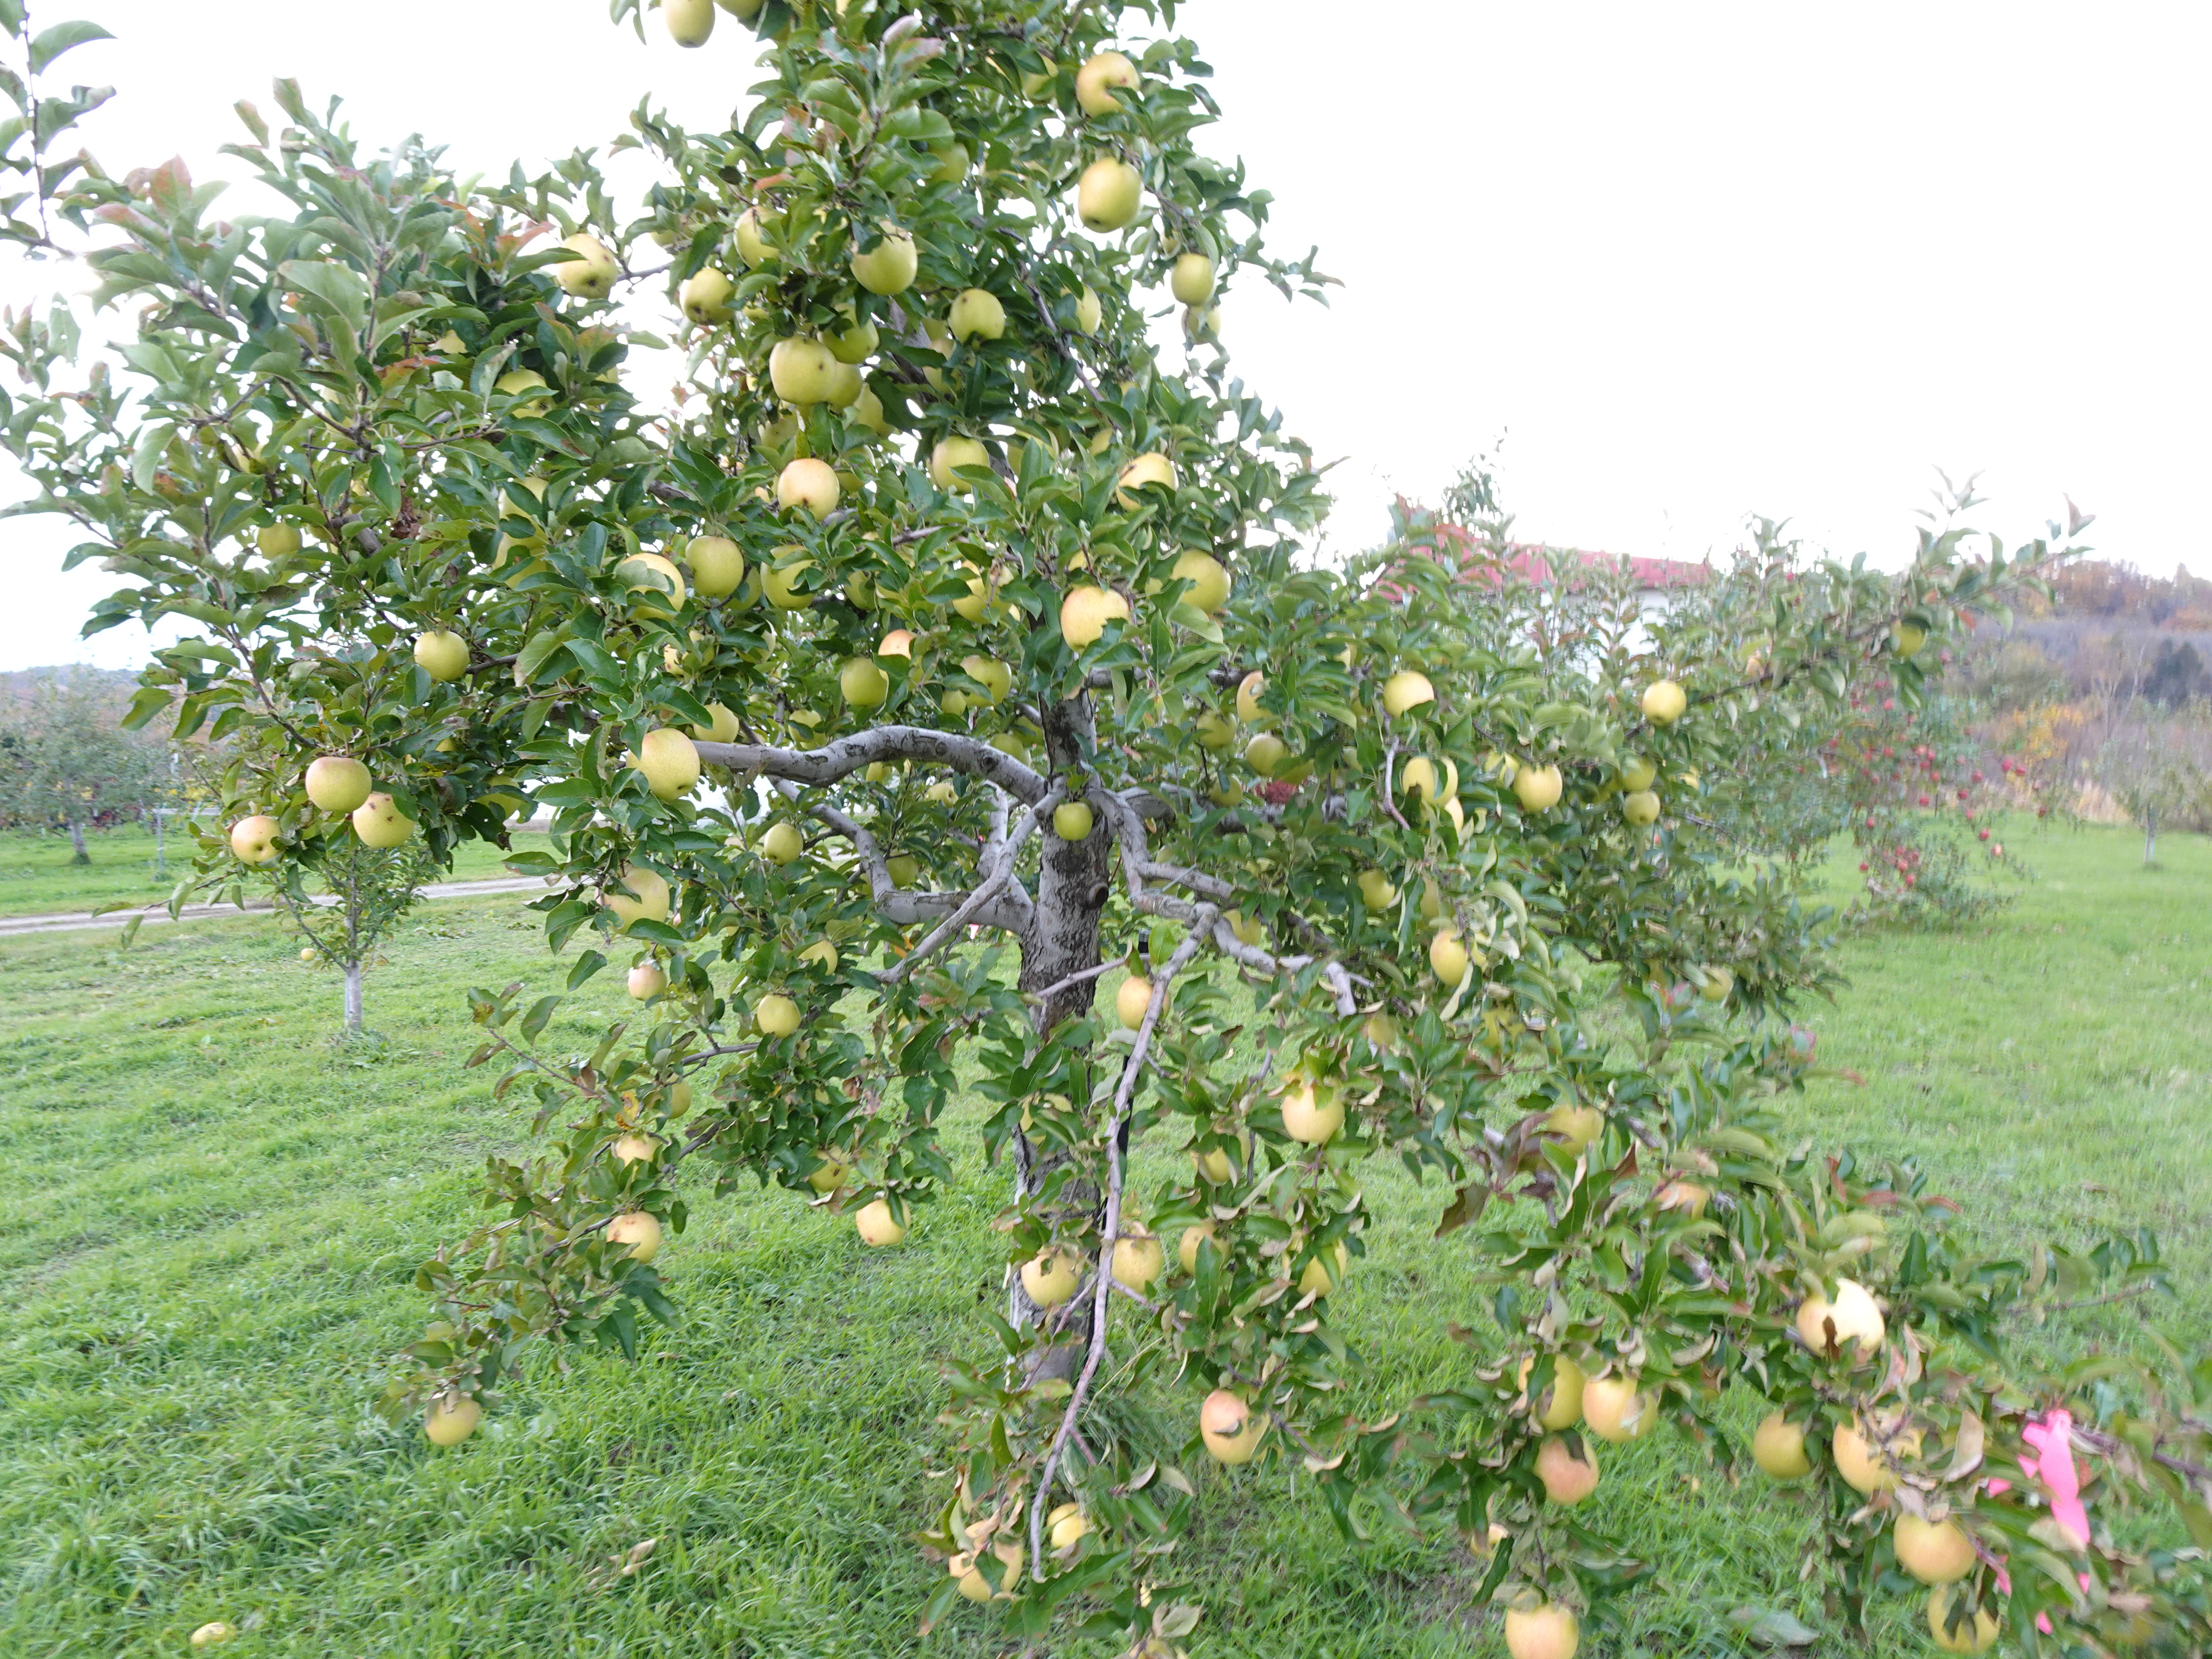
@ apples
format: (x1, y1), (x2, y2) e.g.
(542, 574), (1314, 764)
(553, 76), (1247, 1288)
(932, 435), (990, 495)
(1518, 1355), (1535, 1392)
(352, 791), (414, 848)
(1281, 1085), (1345, 1143)
(799, 733), (830, 750)
(1656, 1183), (1709, 1220)
(1752, 1409), (1813, 1479)
(664, 629), (714, 675)
(679, 267), (733, 325)
(785, 1087), (830, 1105)
(959, 654), (1011, 707)
(1676, 777), (1698, 790)
(583, 365), (618, 406)
(855, 1197), (910, 1247)
(1642, 679), (1687, 727)
(1182, 304), (1221, 344)
(424, 1390), (480, 1446)
(1075, 52), (1141, 118)
(949, 1521), (1023, 1602)
(153, 471), (176, 493)
(414, 631), (469, 680)
(555, 233), (618, 298)
(769, 335), (838, 406)
(1022, 54), (1058, 101)
(1208, 776), (1242, 807)
(1053, 802), (1093, 840)
(618, 553), (685, 623)
(1366, 1014), (1394, 1045)
(404, 737), (454, 773)
(1200, 1388), (1271, 1465)
(1357, 870), (1395, 910)
(1795, 1277), (1885, 1364)
(903, 758), (911, 775)
(831, 444), (875, 491)
(1067, 549), (1110, 575)
(885, 854), (917, 887)
(924, 782), (959, 809)
(625, 728), (700, 801)
(763, 823), (803, 867)
(1110, 1221), (1162, 1294)
(841, 657), (889, 708)
(817, 303), (879, 364)
(858, 532), (883, 559)
(1145, 548), (1231, 613)
(258, 519), (302, 561)
(664, 645), (691, 677)
(776, 458), (840, 522)
(1119, 381), (1141, 396)
(1196, 709), (1237, 751)
(1017, 160), (1050, 197)
(874, 559), (936, 615)
(897, 1011), (928, 1042)
(1680, 768), (1698, 780)
(1546, 1103), (1605, 1154)
(1744, 651), (1770, 677)
(672, 912), (707, 942)
(651, 230), (676, 247)
(1402, 755), (1459, 808)
(866, 761), (892, 784)
(1832, 1406), (1922, 1497)
(1007, 427), (1058, 478)
(1618, 755), (1655, 794)
(593, 867), (670, 935)
(1179, 1220), (1231, 1277)
(923, 142), (969, 187)
(1581, 1372), (1658, 1443)
(734, 205), (784, 270)
(1020, 1244), (1083, 1307)
(1222, 908), (1261, 946)
(826, 361), (863, 410)
(734, 619), (776, 664)
(877, 629), (918, 683)
(1893, 1511), (1976, 1585)
(1505, 1591), (1579, 1659)
(1333, 642), (1351, 674)
(749, 676), (782, 703)
(1528, 1353), (1585, 1430)
(1470, 1523), (1509, 1557)
(1419, 874), (1438, 918)
(492, 368), (556, 419)
(852, 382), (893, 438)
(724, 566), (762, 611)
(231, 443), (264, 474)
(1204, 1128), (1249, 1181)
(904, 316), (948, 341)
(742, 301), (769, 323)
(1383, 670), (1434, 720)
(231, 815), (285, 867)
(1059, 586), (1132, 655)
(498, 477), (548, 550)
(628, 964), (667, 1001)
(684, 535), (743, 598)
(1330, 746), (1364, 775)
(665, 0), (715, 48)
(1046, 1502), (1091, 1550)
(941, 689), (966, 716)
(689, 702), (739, 743)
(1024, 346), (1076, 395)
(855, 872), (872, 895)
(948, 288), (1005, 348)
(1116, 976), (1171, 1030)
(305, 756), (372, 813)
(1020, 1091), (1072, 1144)
(1429, 930), (1469, 986)
(1236, 670), (1272, 725)
(1290, 1237), (1346, 1298)
(1013, 715), (1044, 746)
(1078, 156), (1143, 234)
(1004, 477), (1016, 499)
(1623, 791), (1660, 827)
(1889, 619), (1924, 656)
(754, 484), (771, 504)
(757, 992), (801, 1039)
(988, 732), (1030, 766)
(1513, 763), (1562, 812)
(1059, 283), (1102, 338)
(760, 545), (818, 611)
(1443, 795), (1464, 834)
(647, 1073), (691, 1119)
(714, 0), (760, 18)
(606, 1211), (660, 1264)
(952, 559), (1014, 624)
(848, 220), (918, 295)
(1171, 253), (1214, 305)
(1697, 966), (1731, 1002)
(1089, 427), (1123, 457)
(1245, 735), (1287, 777)
(491, 533), (548, 589)
(1480, 1010), (1526, 1055)
(1161, 226), (1181, 254)
(1927, 1584), (2000, 1654)
(922, 338), (975, 394)
(999, 603), (1021, 627)
(808, 1145), (851, 1192)
(788, 709), (822, 741)
(475, 775), (520, 820)
(1116, 452), (1177, 512)
(614, 1132), (662, 1172)
(1349, 688), (1376, 718)
(1532, 1434), (1599, 1505)
(844, 566), (878, 610)
(797, 940), (838, 976)
(1484, 750), (1520, 787)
